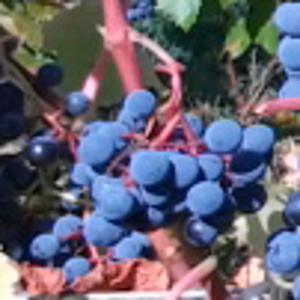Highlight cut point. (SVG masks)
<instances>
[{"instance_id":"1","label":"cut point","mask_w":300,"mask_h":300,"mask_svg":"<svg viewBox=\"0 0 300 300\" xmlns=\"http://www.w3.org/2000/svg\"><path fill=\"white\" fill-rule=\"evenodd\" d=\"M129 38L134 43L150 51L158 59L162 68L171 79L170 93L172 97L180 100L183 97V77L177 59L174 56H169L156 41L141 33L137 28H132L129 31Z\"/></svg>"}]
</instances>
